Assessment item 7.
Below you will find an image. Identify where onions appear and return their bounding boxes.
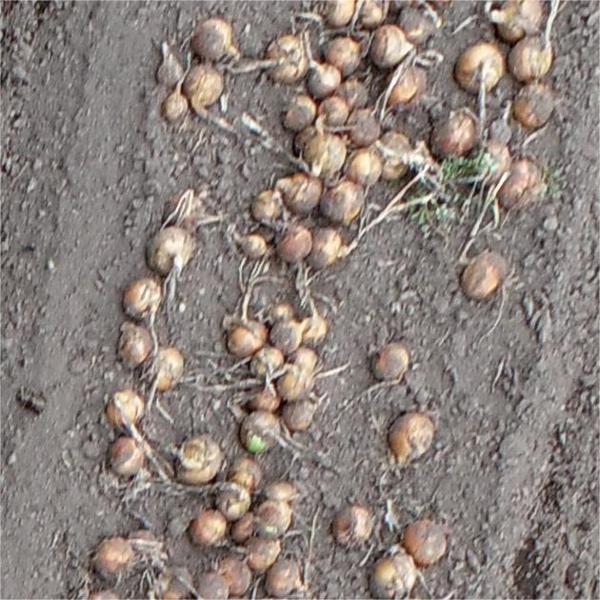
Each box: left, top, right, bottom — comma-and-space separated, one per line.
178, 433, 224, 481
318, 94, 352, 127
325, 0, 357, 27
196, 571, 229, 599
191, 509, 227, 546
469, 141, 513, 183
150, 229, 192, 271
155, 58, 187, 84
320, 181, 364, 221
497, 0, 539, 42
214, 556, 249, 593
509, 40, 551, 79
214, 483, 248, 519
251, 383, 279, 410
370, 341, 408, 379
93, 535, 135, 578
374, 133, 414, 177
346, 111, 378, 145
346, 149, 382, 184
190, 17, 235, 61
509, 84, 552, 126
310, 223, 344, 265
266, 33, 307, 81
128, 531, 158, 549
251, 190, 282, 222
294, 124, 317, 148
276, 367, 310, 397
240, 237, 267, 261
401, 519, 449, 564
264, 480, 295, 504
269, 320, 300, 350
155, 568, 191, 598
232, 512, 257, 539
254, 345, 283, 373
281, 398, 314, 430
455, 44, 503, 90
296, 313, 326, 342
184, 65, 223, 104
271, 304, 295, 323
325, 36, 363, 75
386, 66, 425, 104
275, 225, 309, 260
459, 252, 505, 298
227, 459, 261, 494
306, 136, 346, 176
281, 94, 316, 130
121, 277, 160, 314
495, 160, 540, 207
162, 93, 189, 121
287, 350, 317, 373
264, 559, 301, 594
397, 6, 435, 42
306, 64, 339, 98
360, 1, 388, 28
339, 79, 367, 107
147, 345, 183, 389
332, 502, 374, 545
88, 588, 119, 600
433, 110, 477, 156
385, 414, 434, 460
225, 319, 262, 355
280, 173, 321, 212
108, 436, 143, 475
370, 557, 417, 599
118, 324, 154, 362
241, 414, 276, 451
104, 391, 142, 426
367, 27, 408, 67
245, 536, 278, 572
254, 500, 288, 535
